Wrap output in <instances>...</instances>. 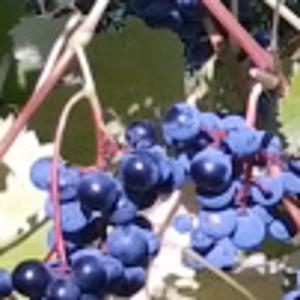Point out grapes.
<instances>
[{
  "label": "grapes",
  "mask_w": 300,
  "mask_h": 300,
  "mask_svg": "<svg viewBox=\"0 0 300 300\" xmlns=\"http://www.w3.org/2000/svg\"><path fill=\"white\" fill-rule=\"evenodd\" d=\"M162 140L144 120L113 137L108 158L95 165L49 155L28 170L30 183L48 191L44 213L52 219L48 246L55 260H22L0 268V297L15 291L27 300L134 299L147 286V258L160 250L150 219L156 190L190 182L198 205L196 229L185 213L171 219L189 233L182 263L191 271L232 272L239 252H253L265 233L278 245L297 237L296 225L278 214L286 198L300 196V158L286 156V140L272 127H248L239 112L218 115L188 102L162 114Z\"/></svg>",
  "instance_id": "grapes-1"
}]
</instances>
